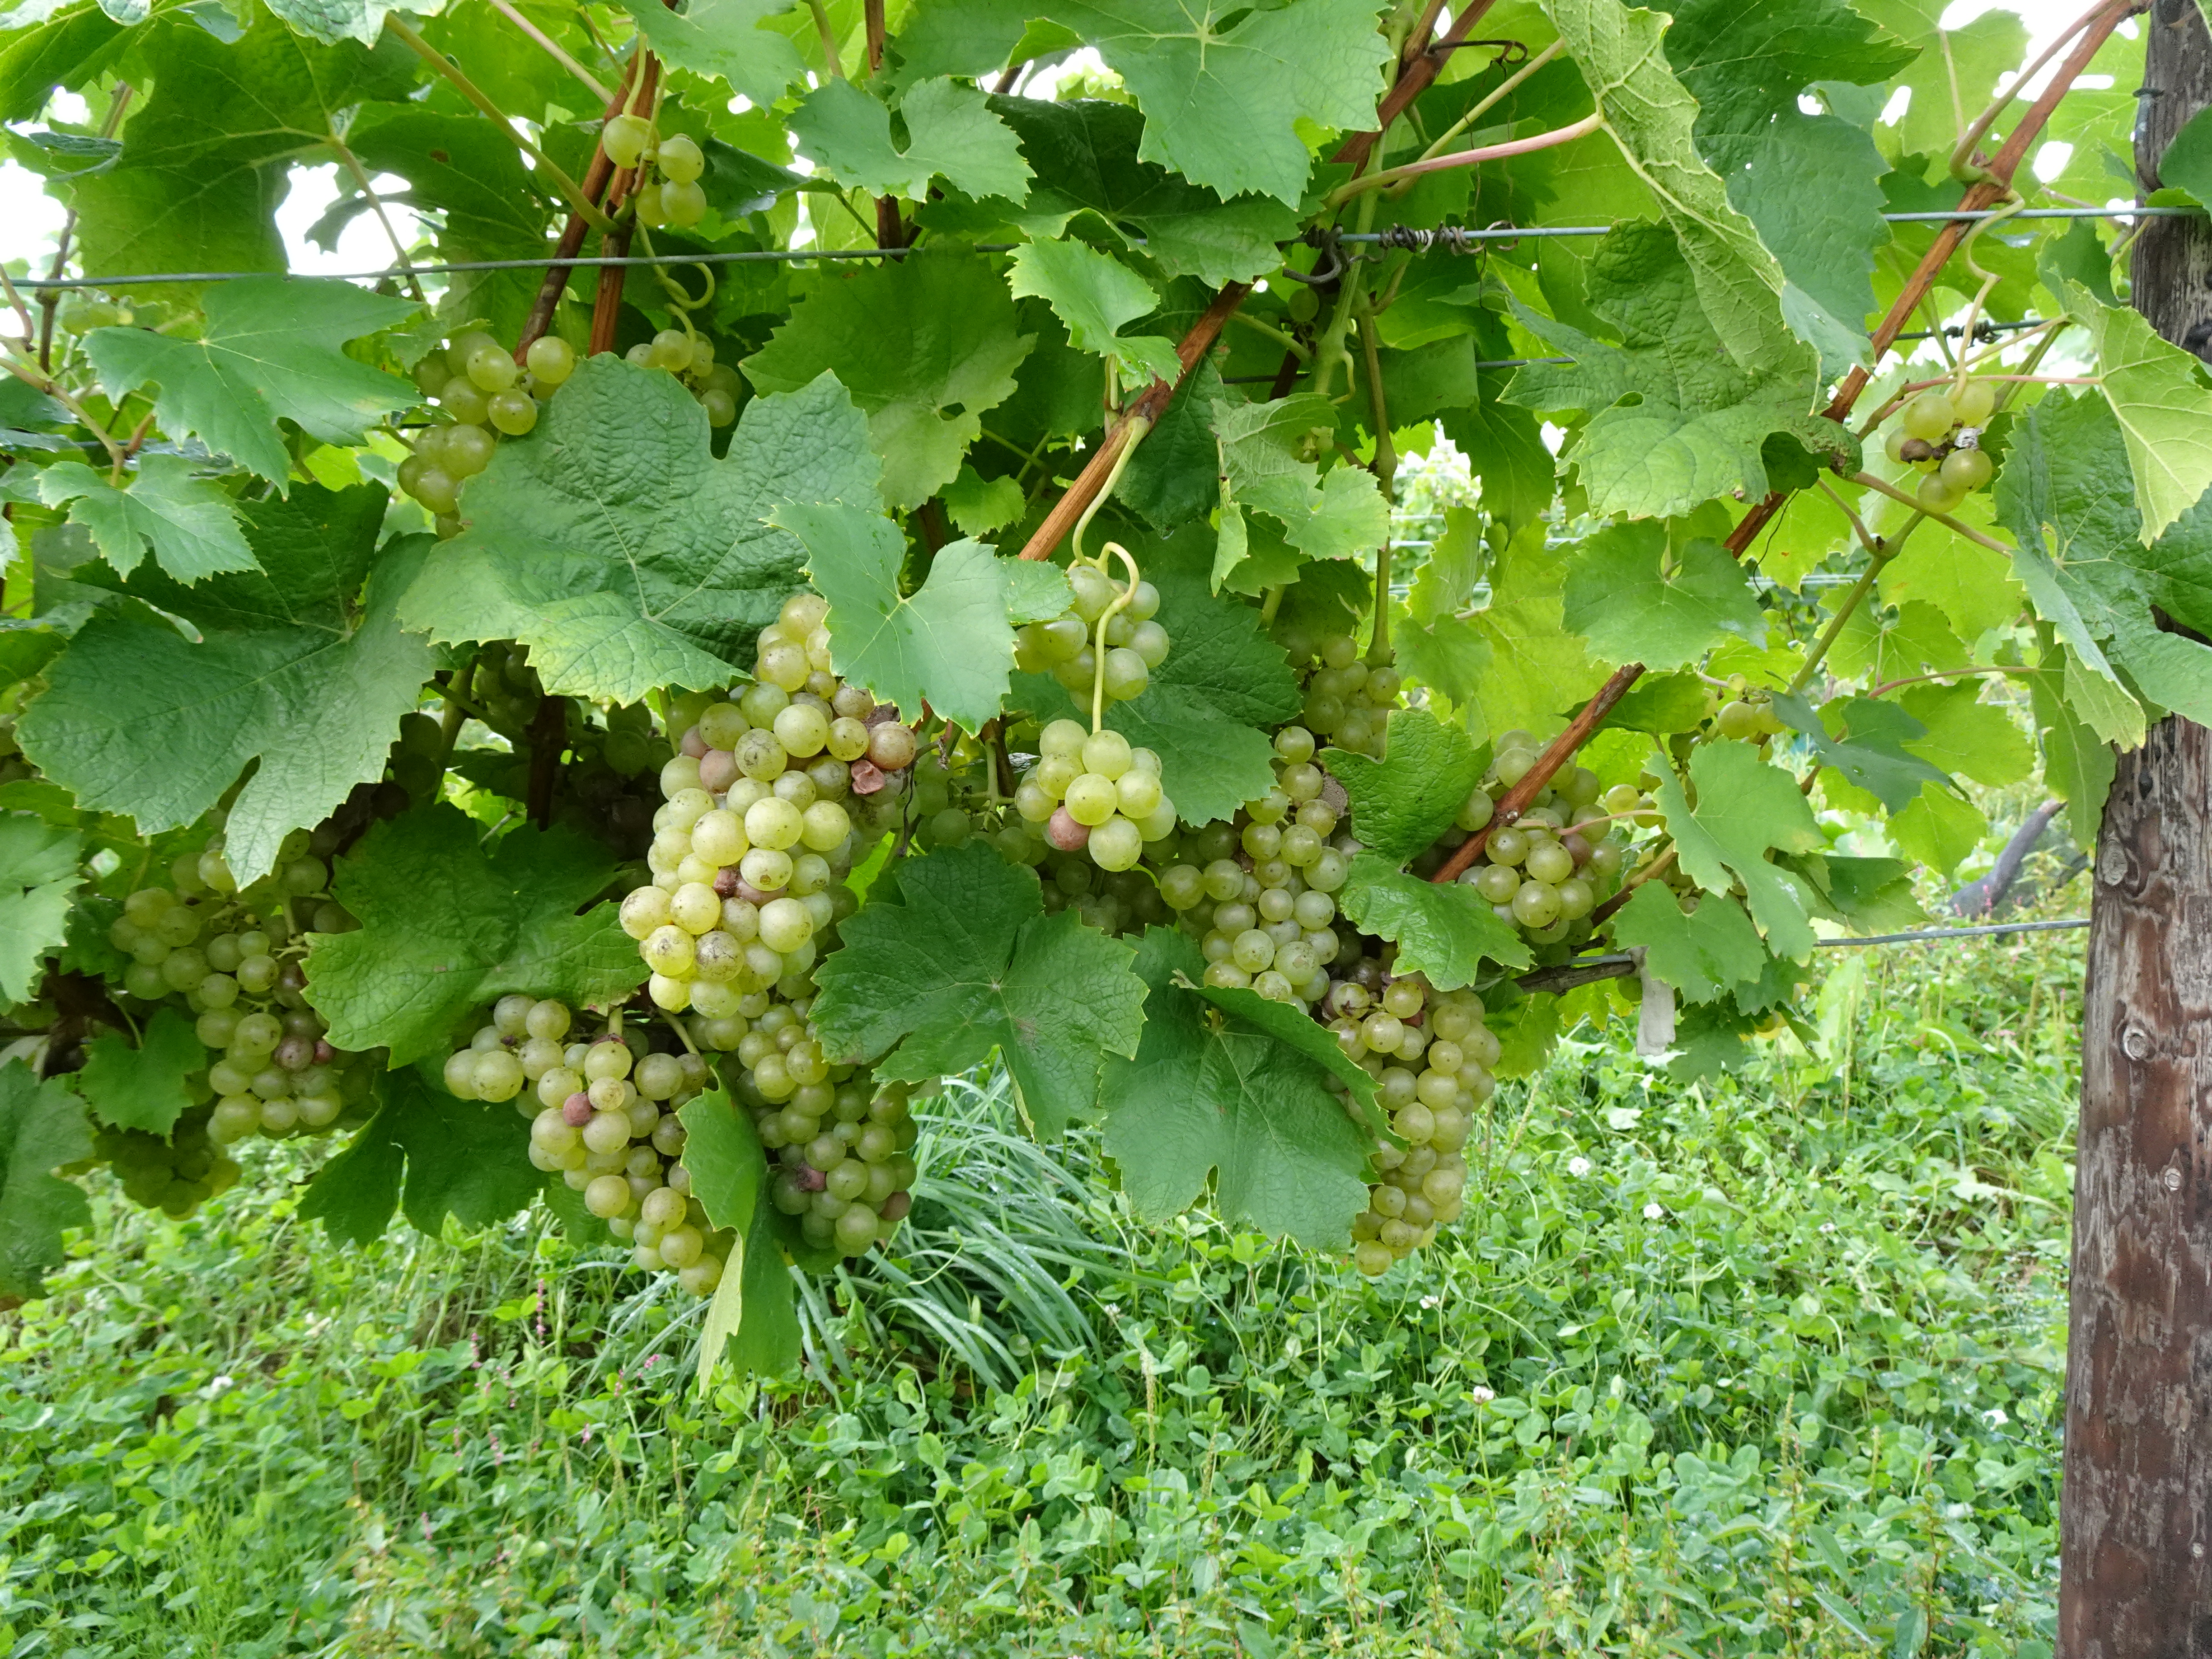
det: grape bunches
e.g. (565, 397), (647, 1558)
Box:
(93, 1092), (242, 1221)
(1604, 673), (1787, 915)
(476, 638), (542, 726)
(442, 994), (736, 1300)
(1142, 726), (1367, 1016)
(1016, 718), (1176, 871)
(110, 783), (390, 1143)
(1886, 380), (1995, 515)
(686, 999), (917, 1259)
(1040, 846), (1176, 941)
(916, 730), (1050, 867)
(1318, 947), (1503, 1275)
(332, 713), (442, 831)
(1413, 732), (1624, 965)
(1739, 982), (1811, 1043)
(512, 699), (674, 905)
(398, 319), (576, 538)
(618, 594), (917, 1020)
(602, 114), (707, 228)
(1598, 920), (1643, 1002)
(625, 329), (743, 427)
(1014, 565), (1170, 716)
(1267, 627), (1402, 763)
